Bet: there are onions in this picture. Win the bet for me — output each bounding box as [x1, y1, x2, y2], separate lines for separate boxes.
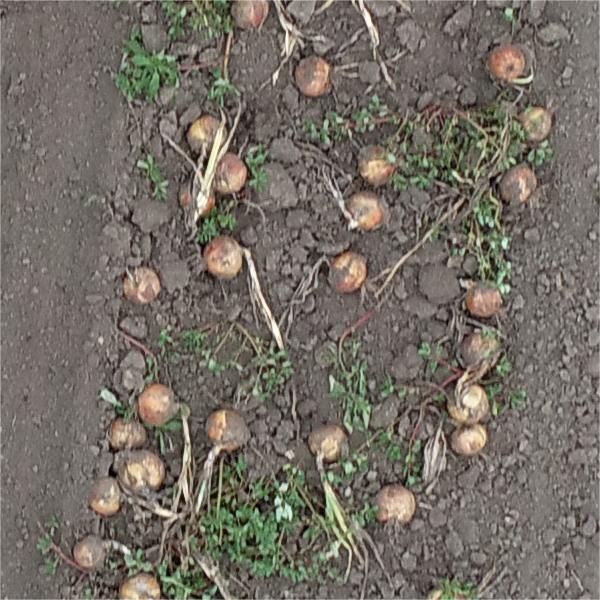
[309, 424, 347, 461]
[184, 114, 218, 149]
[519, 105, 550, 138]
[452, 422, 486, 454]
[487, 43, 527, 82]
[71, 534, 103, 568]
[450, 383, 488, 421]
[358, 147, 394, 184]
[373, 483, 415, 524]
[496, 164, 535, 202]
[291, 57, 331, 96]
[457, 327, 503, 367]
[181, 184, 210, 215]
[118, 450, 164, 492]
[135, 383, 176, 423]
[203, 236, 241, 275]
[86, 475, 120, 513]
[326, 252, 366, 293]
[122, 268, 158, 303]
[346, 189, 384, 230]
[465, 281, 501, 317]
[231, 1, 265, 31]
[214, 156, 246, 192]
[121, 571, 160, 599]
[107, 417, 146, 448]
[203, 408, 248, 448]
